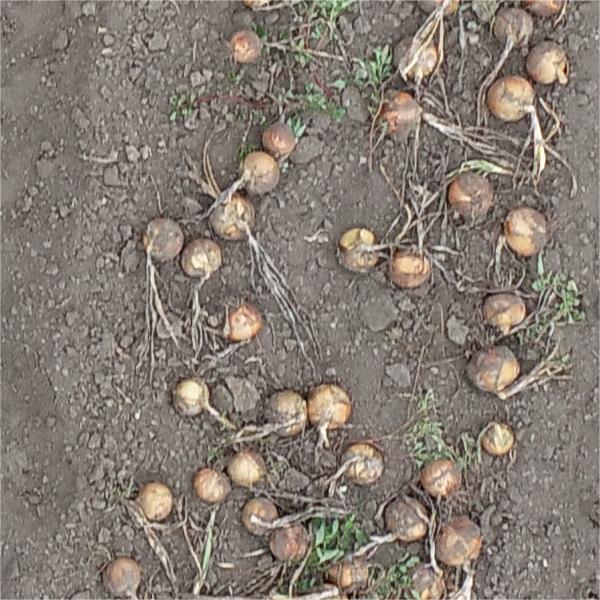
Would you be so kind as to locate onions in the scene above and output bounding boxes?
[266,388,305,434]
[447,170,493,219]
[493,9,530,45]
[99,556,139,593]
[241,495,276,531]
[419,0,461,15]
[477,422,513,457]
[224,303,262,341]
[400,37,438,79]
[261,122,294,154]
[179,239,222,276]
[526,42,567,84]
[340,443,382,484]
[328,554,364,591]
[194,467,228,502]
[227,447,263,485]
[229,30,261,62]
[142,217,186,260]
[268,523,307,561]
[339,224,380,269]
[134,480,171,520]
[469,347,517,392]
[409,562,444,595]
[525,0,561,20]
[238,149,278,192]
[484,291,524,328]
[419,458,458,496]
[245,0,273,10]
[210,196,252,238]
[170,377,207,414]
[489,75,533,118]
[383,495,427,538]
[378,90,419,136]
[389,246,427,287]
[502,208,549,254]
[305,385,350,432]
[432,517,481,564]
